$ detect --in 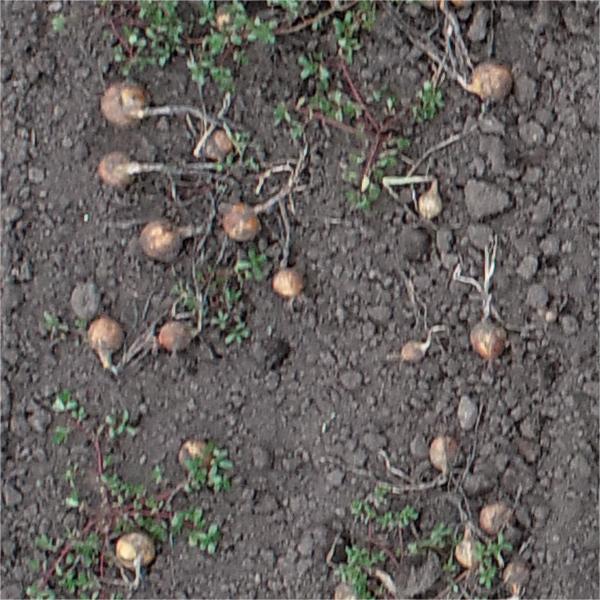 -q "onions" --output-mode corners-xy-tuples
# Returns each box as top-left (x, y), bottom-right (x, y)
(452, 538), (477, 567)
(179, 438), (207, 472)
(211, 1), (248, 30)
(399, 338), (423, 362)
(468, 321), (507, 358)
(271, 267), (303, 296)
(465, 60), (509, 101)
(501, 556), (530, 592)
(216, 201), (257, 240)
(85, 318), (124, 356)
(478, 501), (511, 535)
(101, 81), (145, 125)
(196, 127), (233, 160)
(155, 318), (193, 351)
(426, 437), (453, 469)
(137, 219), (180, 262)
(96, 150), (139, 189)
(416, 181), (442, 217)
(112, 533), (154, 572)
